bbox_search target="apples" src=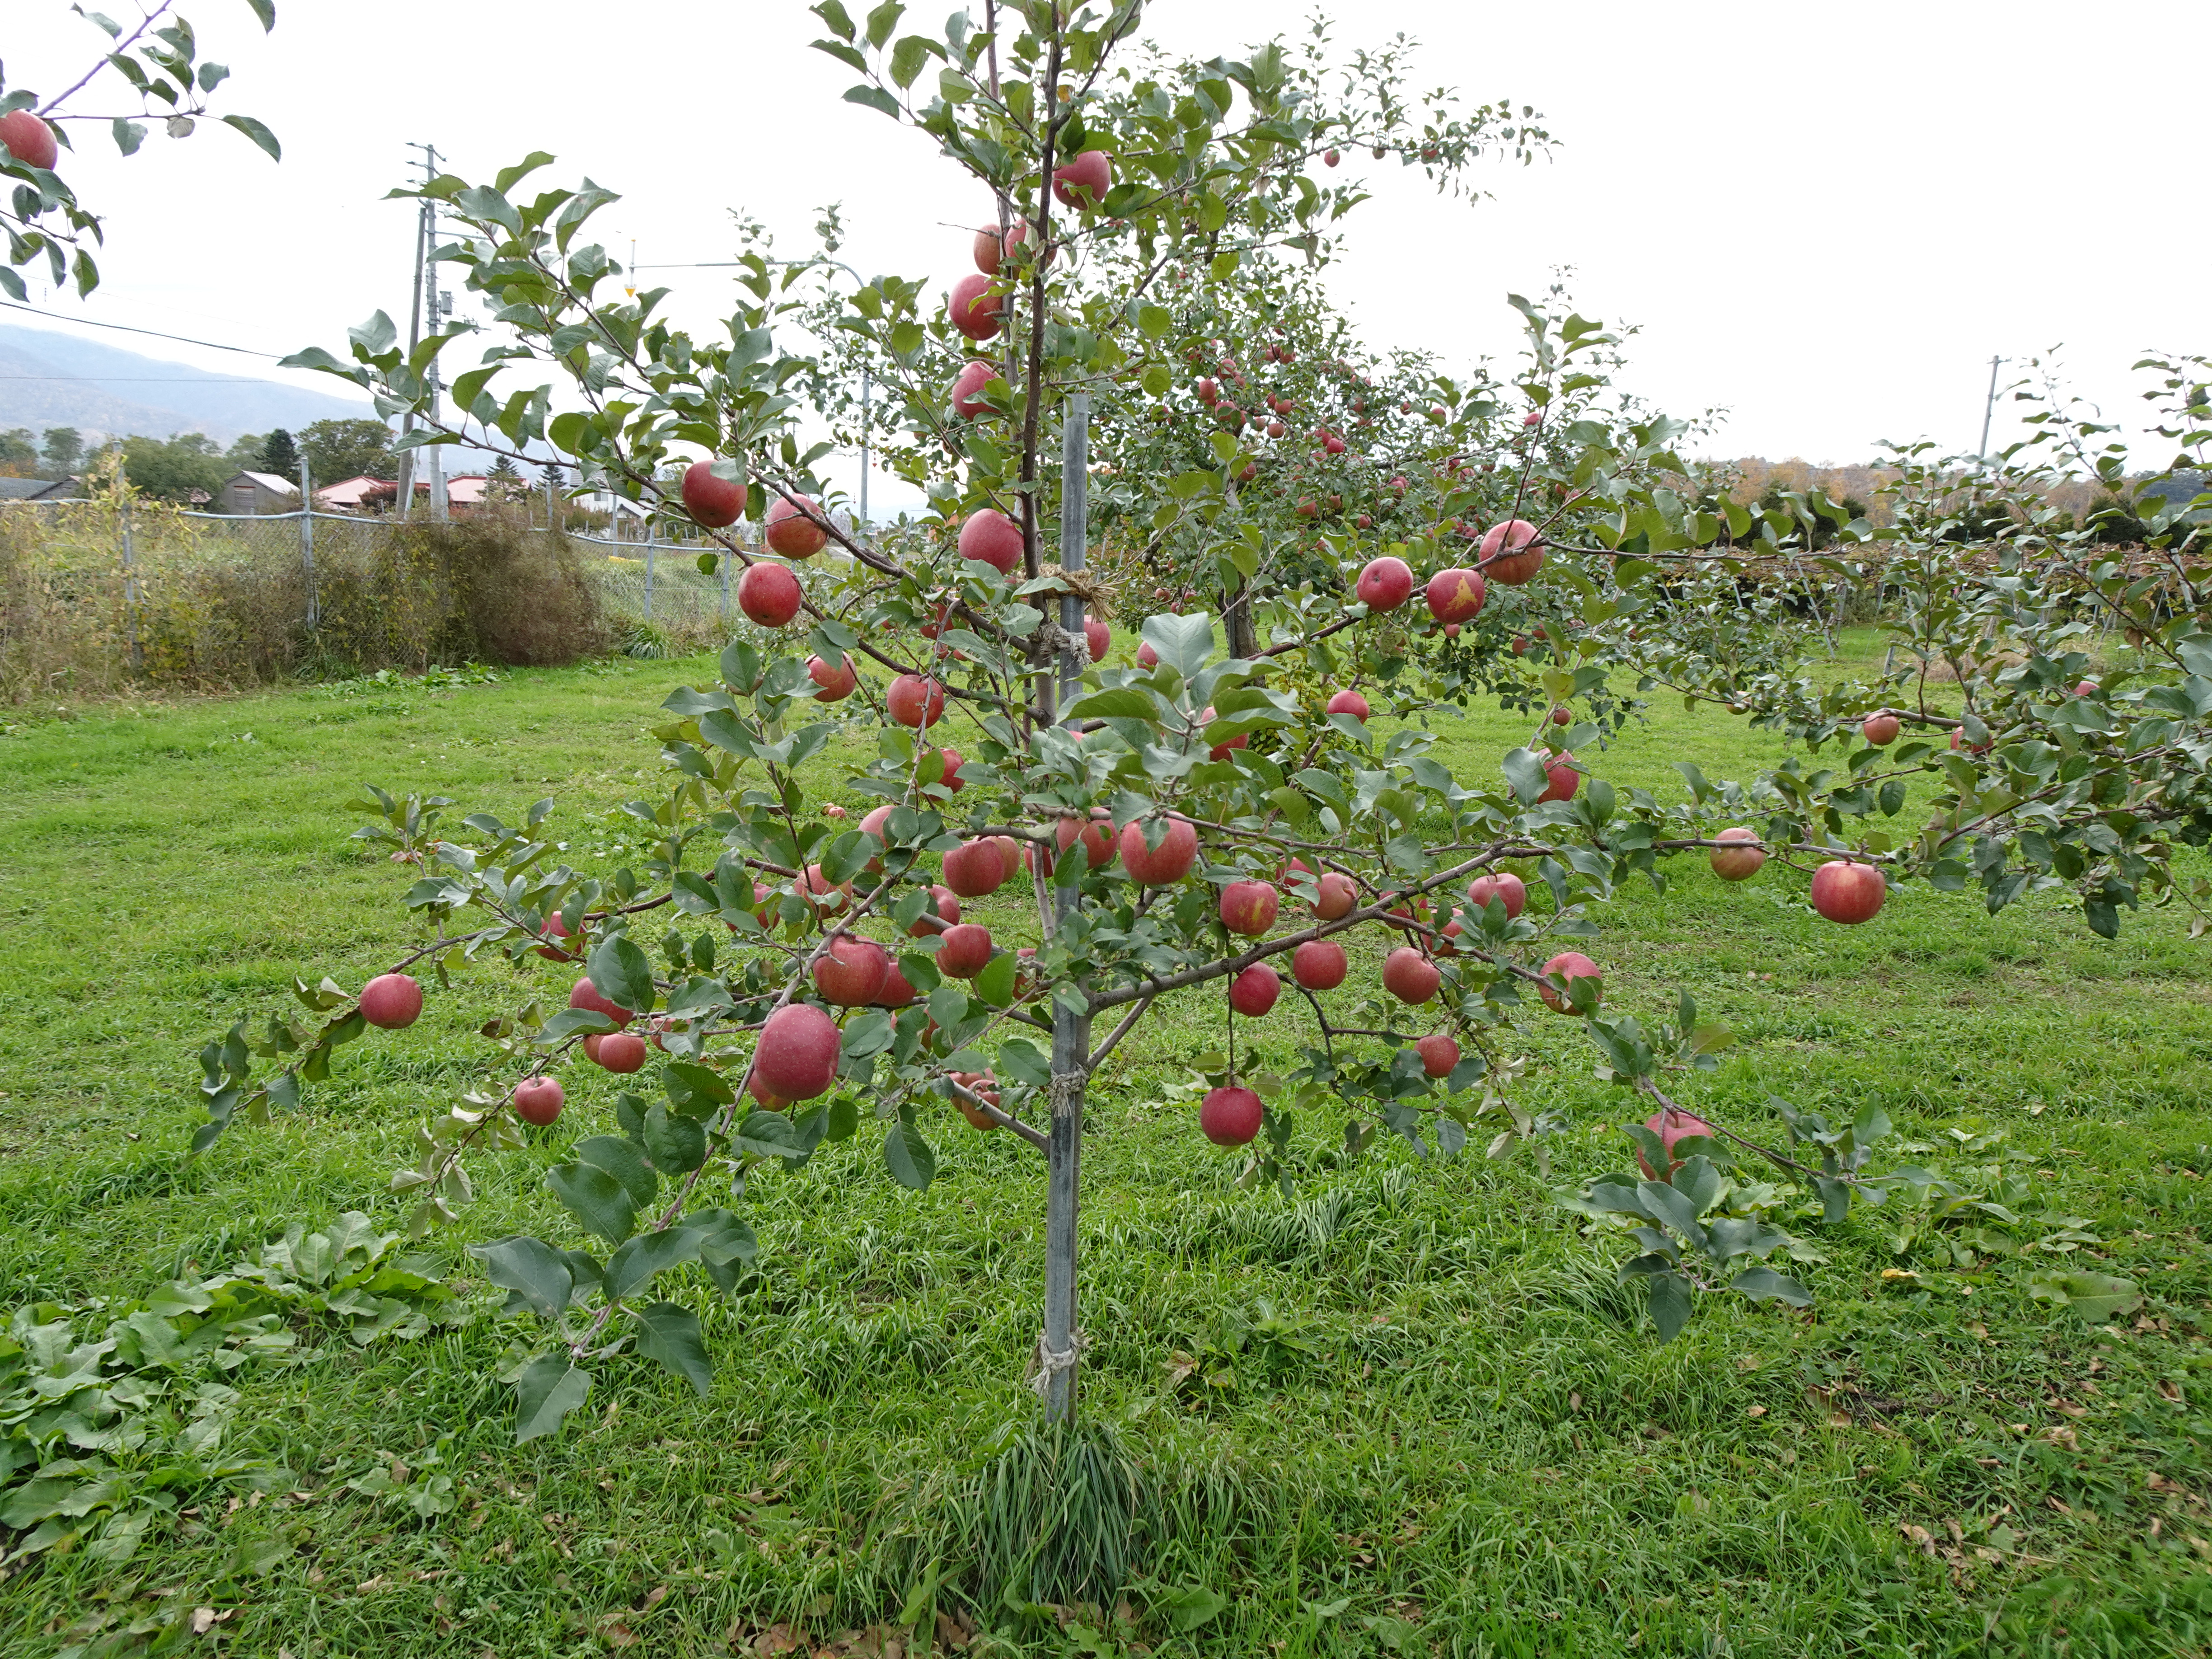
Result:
[749,1069,793,1112]
[514,1077,563,1126]
[682,460,747,528]
[1379,884,1427,930]
[938,924,991,975]
[598,1030,646,1073]
[942,840,1005,897]
[1357,556,1413,612]
[1137,641,1158,672]
[1220,881,1279,935]
[1535,747,1579,804]
[649,1017,691,1052]
[1811,860,1885,924]
[1479,520,1545,585]
[1308,872,1357,921]
[958,508,1024,576]
[952,360,1002,424]
[934,951,975,978]
[794,863,853,920]
[1343,876,1357,898]
[962,1079,1007,1130]
[1951,724,1992,760]
[887,674,944,729]
[1200,1086,1263,1146]
[738,561,801,627]
[570,977,633,1036]
[804,651,856,702]
[1199,706,1249,763]
[535,911,587,963]
[583,1034,605,1065]
[909,884,960,939]
[920,603,954,640]
[1383,947,1440,1005]
[1538,952,1603,1016]
[948,1067,995,1113]
[972,835,1021,884]
[933,642,949,659]
[1865,711,1898,745]
[1468,873,1525,922]
[1003,576,1029,603]
[1004,219,1057,269]
[953,649,968,661]
[873,957,917,1006]
[2072,681,2099,699]
[1710,828,1765,881]
[973,224,1009,277]
[1012,948,1051,1003]
[1420,908,1464,956]
[1024,840,1053,878]
[1083,614,1110,665]
[857,805,920,876]
[1051,150,1111,210]
[916,748,965,801]
[1637,1111,1714,1187]
[1293,940,1347,990]
[360,974,422,1029]
[813,934,889,1007]
[948,274,1003,340]
[1056,806,1118,867]
[1327,690,1369,725]
[765,493,827,559]
[1426,569,1485,624]
[1276,856,1324,897]
[1414,1035,1459,1078]
[1067,730,1084,742]
[881,619,895,630]
[891,1009,941,1053]
[726,882,780,932]
[754,1004,841,1100]
[5,117,60,178]
[1230,961,1280,1017]
[1120,811,1198,885]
